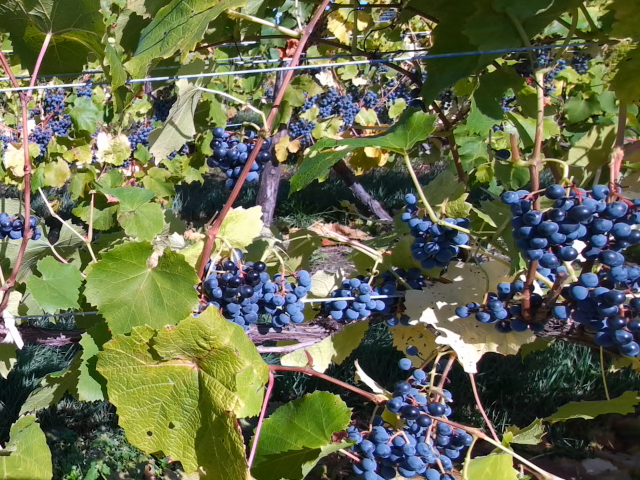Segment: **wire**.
I'll use <instances>...</instances> for the list:
<instances>
[{
	"label": "wire",
	"instance_id": "1",
	"mask_svg": "<svg viewBox=\"0 0 640 480\" xmlns=\"http://www.w3.org/2000/svg\"><path fill=\"white\" fill-rule=\"evenodd\" d=\"M573 45L597 46L598 41L597 40H571V41H564V42H558V43H533V44H528L524 46L513 47L510 49H503V50H457V51H449L444 53H434V54H426V55H405V56L390 55V56H381V57L356 59V60H340V61H327V62L308 63V64H295V65H288L283 67L262 68V69H231V70L204 72L201 74L148 76L144 78L127 79L126 83L134 84V83H146L150 81L203 79L206 77H215V76L233 75V74H264V73L285 72V71L298 70V69H311V68H320V67H329V66L371 64L375 62L392 61V60H399V59H417V58L434 59V58L463 56V55H505V54H512L515 52H521V51H526V50L535 49V48H560V47L573 46Z\"/></svg>",
	"mask_w": 640,
	"mask_h": 480
},
{
	"label": "wire",
	"instance_id": "2",
	"mask_svg": "<svg viewBox=\"0 0 640 480\" xmlns=\"http://www.w3.org/2000/svg\"><path fill=\"white\" fill-rule=\"evenodd\" d=\"M107 81L98 82H68L64 84L25 85L11 88H0V93H14L27 90L66 89L70 87H100L107 86Z\"/></svg>",
	"mask_w": 640,
	"mask_h": 480
},
{
	"label": "wire",
	"instance_id": "3",
	"mask_svg": "<svg viewBox=\"0 0 640 480\" xmlns=\"http://www.w3.org/2000/svg\"><path fill=\"white\" fill-rule=\"evenodd\" d=\"M97 309H84V310H73L67 312H57L53 314H30V315H17V320H33V319H56L59 317H69L75 315H86V314H97Z\"/></svg>",
	"mask_w": 640,
	"mask_h": 480
}]
</instances>
